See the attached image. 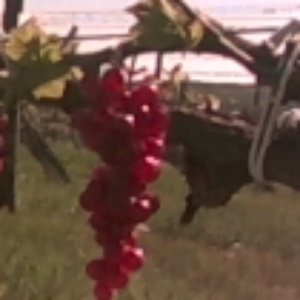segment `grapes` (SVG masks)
Here are the masks:
<instances>
[{"label":"grapes","mask_w":300,"mask_h":300,"mask_svg":"<svg viewBox=\"0 0 300 300\" xmlns=\"http://www.w3.org/2000/svg\"><path fill=\"white\" fill-rule=\"evenodd\" d=\"M62 106L73 127L83 132L84 145L100 154L96 167L78 195L80 207L91 211L95 241L101 258L90 260L88 277L95 282L97 300H115L127 287L129 274L140 271L144 253L131 233L161 207L159 196L146 183L161 174L166 134L171 125L167 106L158 101L160 90L144 81L132 90L116 68L68 82Z\"/></svg>","instance_id":"01657485"}]
</instances>
